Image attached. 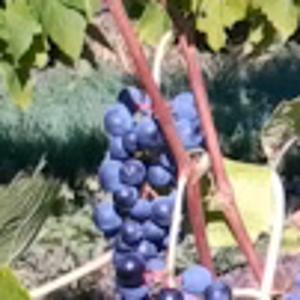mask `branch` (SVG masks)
I'll use <instances>...</instances> for the list:
<instances>
[{"label": "branch", "mask_w": 300, "mask_h": 300, "mask_svg": "<svg viewBox=\"0 0 300 300\" xmlns=\"http://www.w3.org/2000/svg\"><path fill=\"white\" fill-rule=\"evenodd\" d=\"M105 6L114 18L117 30L127 47L130 59L136 71L142 89L146 94L159 127L163 131L164 140L177 161L179 171L186 170L187 178V209L190 215L191 237L198 262L206 269L216 264L212 255L206 232L205 211L202 205V183L198 163L189 158L177 138V126L174 124L166 99L152 76V70L145 54L142 42L134 31L131 17L120 0H106Z\"/></svg>", "instance_id": "1"}, {"label": "branch", "mask_w": 300, "mask_h": 300, "mask_svg": "<svg viewBox=\"0 0 300 300\" xmlns=\"http://www.w3.org/2000/svg\"><path fill=\"white\" fill-rule=\"evenodd\" d=\"M175 36L180 57L183 61L190 89L192 91L196 121L206 145V162L215 190L220 196L219 210L225 219L226 225L234 233L239 244L250 259L257 279L266 274V268L259 259L256 250L249 239L241 221L235 203V190L228 177L221 158V142L219 140L209 107V99L205 78L197 58L198 44L192 39L189 18L179 13L174 18Z\"/></svg>", "instance_id": "2"}]
</instances>
